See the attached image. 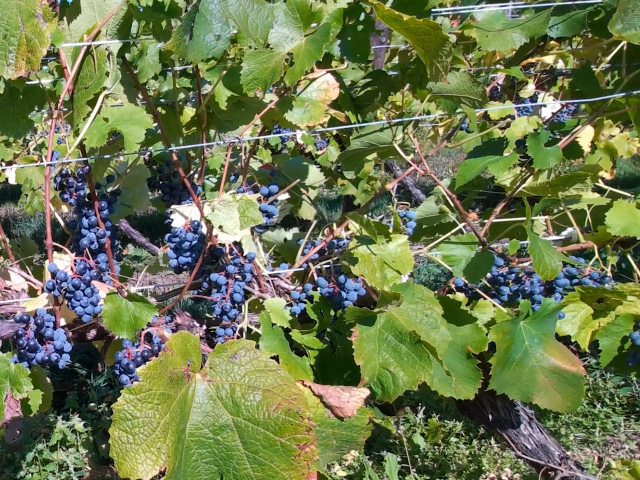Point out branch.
Segmentation results:
<instances>
[{
	"instance_id": "branch-1",
	"label": "branch",
	"mask_w": 640,
	"mask_h": 480,
	"mask_svg": "<svg viewBox=\"0 0 640 480\" xmlns=\"http://www.w3.org/2000/svg\"><path fill=\"white\" fill-rule=\"evenodd\" d=\"M468 118L467 114H463L460 119L458 120V122L455 124V126L452 128V130L449 132V134L444 138V140L439 143L436 144L435 146H433L430 150L426 151L423 155L422 152L419 148V146L417 145V143L415 142L414 138H413V134L412 133H408L407 137L408 140L411 144V146L414 148L415 153L417 154V158L418 160L415 162L416 166H420L422 167V169L425 171V173L427 174L428 178L434 182L438 187H440L444 193L446 195H448L450 197V199L453 201V203L455 204V207L457 208L459 214L462 216V218L464 219V221L466 222L467 226L471 229V231L473 232V234L475 235V237L480 241V243L483 246L487 245V241L482 237L485 232L487 231V229L491 226V224L493 223L494 219L498 216V214L505 208V206L507 205V202L514 196L517 194V192L530 180V178L533 177V175H535L537 173L536 169H532L523 180H521L515 187L514 189L508 193L504 198L503 201L501 203H499L495 209L494 212L491 214V216L489 217L488 221L485 223V225L482 227V229L480 230V232L477 230V228L474 226V224L471 222L470 218L467 216L466 212L464 211V209L462 208V206L460 205V202L458 201V199L455 197V195L444 185L443 182H441L439 179H437L431 172V170L429 169V167L426 165L425 160L432 155L434 152H436L439 149L444 148L449 141L451 140V138L454 136V134L459 130V128L461 127V125L463 124V122Z\"/></svg>"
},
{
	"instance_id": "branch-2",
	"label": "branch",
	"mask_w": 640,
	"mask_h": 480,
	"mask_svg": "<svg viewBox=\"0 0 640 480\" xmlns=\"http://www.w3.org/2000/svg\"><path fill=\"white\" fill-rule=\"evenodd\" d=\"M170 156L172 157L176 170L183 182V184L185 185V187L187 188V190L189 191L190 195L192 196V198L194 199L196 206L198 208L199 214L202 218L206 217V213L203 209L202 203L200 201L199 196L196 194L195 190L193 189V187L191 186V184L189 183L188 179L186 178L184 171L180 165L179 159L175 153V151H169ZM204 225L206 227V232H207V236H208V242L206 243L205 247L202 250V253L200 254V256L198 257V260L194 266V269L192 270V273L190 274L188 280L189 283L185 285V287L183 288V291L181 292V294L179 295L178 299L174 302H171L170 304H168L167 306H165L163 309H160L158 311L159 315L165 314L167 313L170 309L178 306L183 299L185 298V295L188 293V290L191 288V285L194 281V278L196 277L200 266L203 262V259L206 257L209 249L211 247H219L220 243L218 242V238L216 236H213L212 234V230H211V225L209 222L208 218L204 219Z\"/></svg>"
},
{
	"instance_id": "branch-3",
	"label": "branch",
	"mask_w": 640,
	"mask_h": 480,
	"mask_svg": "<svg viewBox=\"0 0 640 480\" xmlns=\"http://www.w3.org/2000/svg\"><path fill=\"white\" fill-rule=\"evenodd\" d=\"M59 58H60V65H61V70L62 73L65 77L66 83L63 87V90L61 92V94L59 95L57 102L55 104V108H54V112L52 115V120H51V127H50V131H49V135H48V140H47V150H46V162L51 161V153H52V142H53V137H54V133L56 130V123H57V118H58V114H59V110H60V106L62 105L63 99L66 96L67 92L69 94V100L73 101L74 100V87L72 86V81L75 77V75L77 74L81 63L83 61V58L85 56L86 53V48L82 47L80 50V54L78 55V58L76 60V63L73 67V70L71 71L70 75L69 72L66 68V63H65V56L63 53V49L62 48H58L57 49Z\"/></svg>"
},
{
	"instance_id": "branch-4",
	"label": "branch",
	"mask_w": 640,
	"mask_h": 480,
	"mask_svg": "<svg viewBox=\"0 0 640 480\" xmlns=\"http://www.w3.org/2000/svg\"><path fill=\"white\" fill-rule=\"evenodd\" d=\"M120 59L124 62L125 67H126V69H127V72L129 73V76H130V78H131L132 82L134 83V85H135L136 89L140 92V94H141V96H142V98H143V101H144V103H145V105H146V107H147L148 111L150 112L151 116H152V117H153V119L155 120V123L157 124L158 129H159V130H160V132L162 133V136H163V140H164L165 145H166V146H172V143L170 142V140H169V138H168L167 131L165 130V128H164V126H163V124H162V122H161L160 118L158 117V114H157V113H156V111L153 109V107H152V105H151V103H150V101H149V99H148V96H147V94H146V91H145V90L143 89V87L140 85V83H139V81H138V79H137V77H136V75H135V73H134V71H133V69H132V67H131V65H130V62H129L128 58H127V57H125L124 55H121V56H120Z\"/></svg>"
},
{
	"instance_id": "branch-5",
	"label": "branch",
	"mask_w": 640,
	"mask_h": 480,
	"mask_svg": "<svg viewBox=\"0 0 640 480\" xmlns=\"http://www.w3.org/2000/svg\"><path fill=\"white\" fill-rule=\"evenodd\" d=\"M50 170L51 167H45V210H46V239L45 248L48 250V262H53V242H52V227H51V207H50Z\"/></svg>"
},
{
	"instance_id": "branch-6",
	"label": "branch",
	"mask_w": 640,
	"mask_h": 480,
	"mask_svg": "<svg viewBox=\"0 0 640 480\" xmlns=\"http://www.w3.org/2000/svg\"><path fill=\"white\" fill-rule=\"evenodd\" d=\"M346 225H347V221L343 220L335 230H333L331 233L327 234L310 252H308L300 260L297 261V263L292 267L293 271L292 272H288V276L292 277L296 273L298 267H300L309 258L314 256L315 253L318 252L319 249H321L326 242H328L331 238H333L336 235H338L345 228Z\"/></svg>"
},
{
	"instance_id": "branch-7",
	"label": "branch",
	"mask_w": 640,
	"mask_h": 480,
	"mask_svg": "<svg viewBox=\"0 0 640 480\" xmlns=\"http://www.w3.org/2000/svg\"><path fill=\"white\" fill-rule=\"evenodd\" d=\"M415 169L414 165H410L405 172L396 180L392 181L391 183H389L388 185H386L384 188H382L379 192H377L375 195L372 196V198L364 204V206L360 207L357 210L358 214H362L363 212H365L369 207L372 206V204L379 198L381 197L383 194H385L386 192H388L389 190H391L393 187L397 186L398 184H400L402 181H404L408 175Z\"/></svg>"
},
{
	"instance_id": "branch-8",
	"label": "branch",
	"mask_w": 640,
	"mask_h": 480,
	"mask_svg": "<svg viewBox=\"0 0 640 480\" xmlns=\"http://www.w3.org/2000/svg\"><path fill=\"white\" fill-rule=\"evenodd\" d=\"M194 70H195V79H196L197 90H198V119L200 124L201 140L203 143H206L207 137H206V131H205V121L203 116V88H202V82L200 77V68L198 66H195Z\"/></svg>"
},
{
	"instance_id": "branch-9",
	"label": "branch",
	"mask_w": 640,
	"mask_h": 480,
	"mask_svg": "<svg viewBox=\"0 0 640 480\" xmlns=\"http://www.w3.org/2000/svg\"><path fill=\"white\" fill-rule=\"evenodd\" d=\"M291 91L290 87H285L281 92H279L276 96H274L267 104L263 107L260 113L252 119L247 124L243 125L238 132L236 133V137L240 138L241 135L252 126H254L257 122L261 120V118L266 114V112L273 106L275 102H277L281 97H284L288 92Z\"/></svg>"
},
{
	"instance_id": "branch-10",
	"label": "branch",
	"mask_w": 640,
	"mask_h": 480,
	"mask_svg": "<svg viewBox=\"0 0 640 480\" xmlns=\"http://www.w3.org/2000/svg\"><path fill=\"white\" fill-rule=\"evenodd\" d=\"M613 103L612 99H608L596 112V114L591 118L586 120L582 125H580L570 137H568L564 142L561 143L560 148L564 149L567 145H569L576 137L579 135L586 127L589 125H593L596 122L601 114Z\"/></svg>"
},
{
	"instance_id": "branch-11",
	"label": "branch",
	"mask_w": 640,
	"mask_h": 480,
	"mask_svg": "<svg viewBox=\"0 0 640 480\" xmlns=\"http://www.w3.org/2000/svg\"><path fill=\"white\" fill-rule=\"evenodd\" d=\"M105 249H106V261H107L108 266H109V271H110V275H111L113 283H114L115 290L123 298H126L127 297V293L125 291H123V289H122V287H121V285H120V283L118 281V277H117V274L115 272L113 260L111 258V247H110V239L109 238L105 239Z\"/></svg>"
},
{
	"instance_id": "branch-12",
	"label": "branch",
	"mask_w": 640,
	"mask_h": 480,
	"mask_svg": "<svg viewBox=\"0 0 640 480\" xmlns=\"http://www.w3.org/2000/svg\"><path fill=\"white\" fill-rule=\"evenodd\" d=\"M86 181H87V187H88L89 193L93 197V205H94V213H95V216H96V221L98 223L99 228L101 230H105L106 226L103 223V220H102L101 214H100V210H99L98 195L94 190L90 174L86 175Z\"/></svg>"
},
{
	"instance_id": "branch-13",
	"label": "branch",
	"mask_w": 640,
	"mask_h": 480,
	"mask_svg": "<svg viewBox=\"0 0 640 480\" xmlns=\"http://www.w3.org/2000/svg\"><path fill=\"white\" fill-rule=\"evenodd\" d=\"M605 245H606L605 241H594V242L578 243V244H573V245H569V246L558 247L557 248V252L561 253V252L571 251V250L580 249V248L581 249L600 248V247H604Z\"/></svg>"
},
{
	"instance_id": "branch-14",
	"label": "branch",
	"mask_w": 640,
	"mask_h": 480,
	"mask_svg": "<svg viewBox=\"0 0 640 480\" xmlns=\"http://www.w3.org/2000/svg\"><path fill=\"white\" fill-rule=\"evenodd\" d=\"M233 147H234V144H229L228 145V151H227V154H226L224 170H223V172L221 174V177H220V180H219V183H218V194L219 195L223 194V186H224L227 174L229 172V166H230L231 156H232V153H233Z\"/></svg>"
},
{
	"instance_id": "branch-15",
	"label": "branch",
	"mask_w": 640,
	"mask_h": 480,
	"mask_svg": "<svg viewBox=\"0 0 640 480\" xmlns=\"http://www.w3.org/2000/svg\"><path fill=\"white\" fill-rule=\"evenodd\" d=\"M258 144H259V140H254V141H253V143H252V145H251V147H250V150H249L248 156H247V158H246V161L244 162V164H243V166H242V170H241V185H242V186H245V185H246V173H247V168H248V166H249V165H250V163H251V160H252V158H253V155H254L255 149H256V147H257V145H258Z\"/></svg>"
},
{
	"instance_id": "branch-16",
	"label": "branch",
	"mask_w": 640,
	"mask_h": 480,
	"mask_svg": "<svg viewBox=\"0 0 640 480\" xmlns=\"http://www.w3.org/2000/svg\"><path fill=\"white\" fill-rule=\"evenodd\" d=\"M488 249L498 253L503 258H506V259H508L509 261H512V262H518V263H532L533 262V259L531 257H526V258L514 257V256H511L508 253H505L500 248H494L492 244L488 245Z\"/></svg>"
},
{
	"instance_id": "branch-17",
	"label": "branch",
	"mask_w": 640,
	"mask_h": 480,
	"mask_svg": "<svg viewBox=\"0 0 640 480\" xmlns=\"http://www.w3.org/2000/svg\"><path fill=\"white\" fill-rule=\"evenodd\" d=\"M115 14H116V11H115V10H112V11L110 12V14L107 16V18H105L102 22H100V23H99V25H97V26H96V28L94 29V31H93V32H92L88 37H86V38H85V41H86V42H90L91 40H93V39L97 36V34L100 32V30H101V29H102V28H103L107 23H110V22H111V20H112V19L114 18V16H115Z\"/></svg>"
},
{
	"instance_id": "branch-18",
	"label": "branch",
	"mask_w": 640,
	"mask_h": 480,
	"mask_svg": "<svg viewBox=\"0 0 640 480\" xmlns=\"http://www.w3.org/2000/svg\"><path fill=\"white\" fill-rule=\"evenodd\" d=\"M0 238H1L2 245L4 246L6 252H7L8 256H9L10 262L11 263H15L16 259H15L13 251L11 250L9 244L7 243L6 236H5V231L3 229V224L2 223H0Z\"/></svg>"
},
{
	"instance_id": "branch-19",
	"label": "branch",
	"mask_w": 640,
	"mask_h": 480,
	"mask_svg": "<svg viewBox=\"0 0 640 480\" xmlns=\"http://www.w3.org/2000/svg\"><path fill=\"white\" fill-rule=\"evenodd\" d=\"M206 168H207V148H202V166L200 168V171L197 177L198 185L202 184V180H203V176L205 174Z\"/></svg>"
},
{
	"instance_id": "branch-20",
	"label": "branch",
	"mask_w": 640,
	"mask_h": 480,
	"mask_svg": "<svg viewBox=\"0 0 640 480\" xmlns=\"http://www.w3.org/2000/svg\"><path fill=\"white\" fill-rule=\"evenodd\" d=\"M640 73V68H636L635 70L631 71L628 73V75L625 76V78L622 80V82L618 85V87L616 88V90L613 91V93H618L621 92V90L623 89V87L628 83V81L633 77L636 76L637 74Z\"/></svg>"
},
{
	"instance_id": "branch-21",
	"label": "branch",
	"mask_w": 640,
	"mask_h": 480,
	"mask_svg": "<svg viewBox=\"0 0 640 480\" xmlns=\"http://www.w3.org/2000/svg\"><path fill=\"white\" fill-rule=\"evenodd\" d=\"M252 265H253L255 273L257 275L258 287H259L261 293L265 294L266 293V288H265V286L263 284V281H262L261 270L259 268V265H258V263L256 261H253Z\"/></svg>"
},
{
	"instance_id": "branch-22",
	"label": "branch",
	"mask_w": 640,
	"mask_h": 480,
	"mask_svg": "<svg viewBox=\"0 0 640 480\" xmlns=\"http://www.w3.org/2000/svg\"><path fill=\"white\" fill-rule=\"evenodd\" d=\"M508 75L507 71H503L501 72L499 75H497L492 81L491 83L488 85V87L486 88L487 92H490L494 86L499 82V80H501L502 78L506 77Z\"/></svg>"
},
{
	"instance_id": "branch-23",
	"label": "branch",
	"mask_w": 640,
	"mask_h": 480,
	"mask_svg": "<svg viewBox=\"0 0 640 480\" xmlns=\"http://www.w3.org/2000/svg\"><path fill=\"white\" fill-rule=\"evenodd\" d=\"M153 331L158 335L159 339L162 342L168 343L169 339L167 337L164 336V334L161 332V330L159 329L158 326H154L153 327Z\"/></svg>"
}]
</instances>
